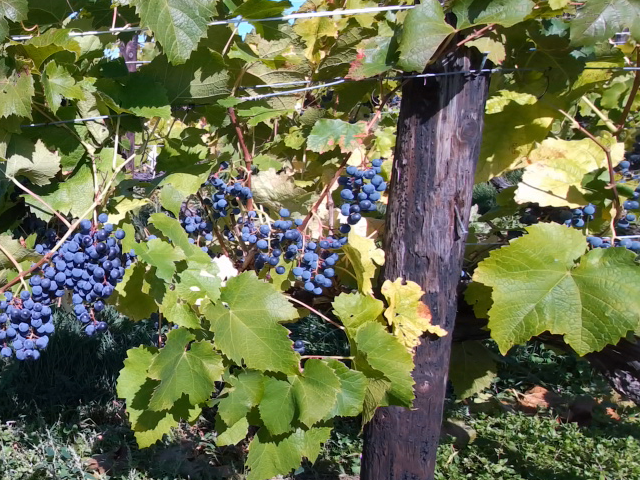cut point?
<instances>
[{
    "instance_id": "obj_1",
    "label": "cut point",
    "mask_w": 640,
    "mask_h": 480,
    "mask_svg": "<svg viewBox=\"0 0 640 480\" xmlns=\"http://www.w3.org/2000/svg\"><path fill=\"white\" fill-rule=\"evenodd\" d=\"M314 217H316L320 228H323V224H322V220H321L320 216L316 212H312V214L310 215L309 219H307V221L305 223L304 229H308L309 228L310 222H312Z\"/></svg>"
},
{
    "instance_id": "obj_2",
    "label": "cut point",
    "mask_w": 640,
    "mask_h": 480,
    "mask_svg": "<svg viewBox=\"0 0 640 480\" xmlns=\"http://www.w3.org/2000/svg\"><path fill=\"white\" fill-rule=\"evenodd\" d=\"M616 210H617V208L615 209L614 213L609 218V224H610V227L612 229V234H615V226L613 224V219L615 217Z\"/></svg>"
},
{
    "instance_id": "obj_4",
    "label": "cut point",
    "mask_w": 640,
    "mask_h": 480,
    "mask_svg": "<svg viewBox=\"0 0 640 480\" xmlns=\"http://www.w3.org/2000/svg\"><path fill=\"white\" fill-rule=\"evenodd\" d=\"M20 281H21V283H20V285L17 287V290H20L21 288H23V286H24L25 290H28V285H27V283L24 281V278H22Z\"/></svg>"
},
{
    "instance_id": "obj_3",
    "label": "cut point",
    "mask_w": 640,
    "mask_h": 480,
    "mask_svg": "<svg viewBox=\"0 0 640 480\" xmlns=\"http://www.w3.org/2000/svg\"><path fill=\"white\" fill-rule=\"evenodd\" d=\"M246 160H247V157H243V158H239V159H236V160H232V161H230V165L232 166V168H235V163L246 161Z\"/></svg>"
}]
</instances>
